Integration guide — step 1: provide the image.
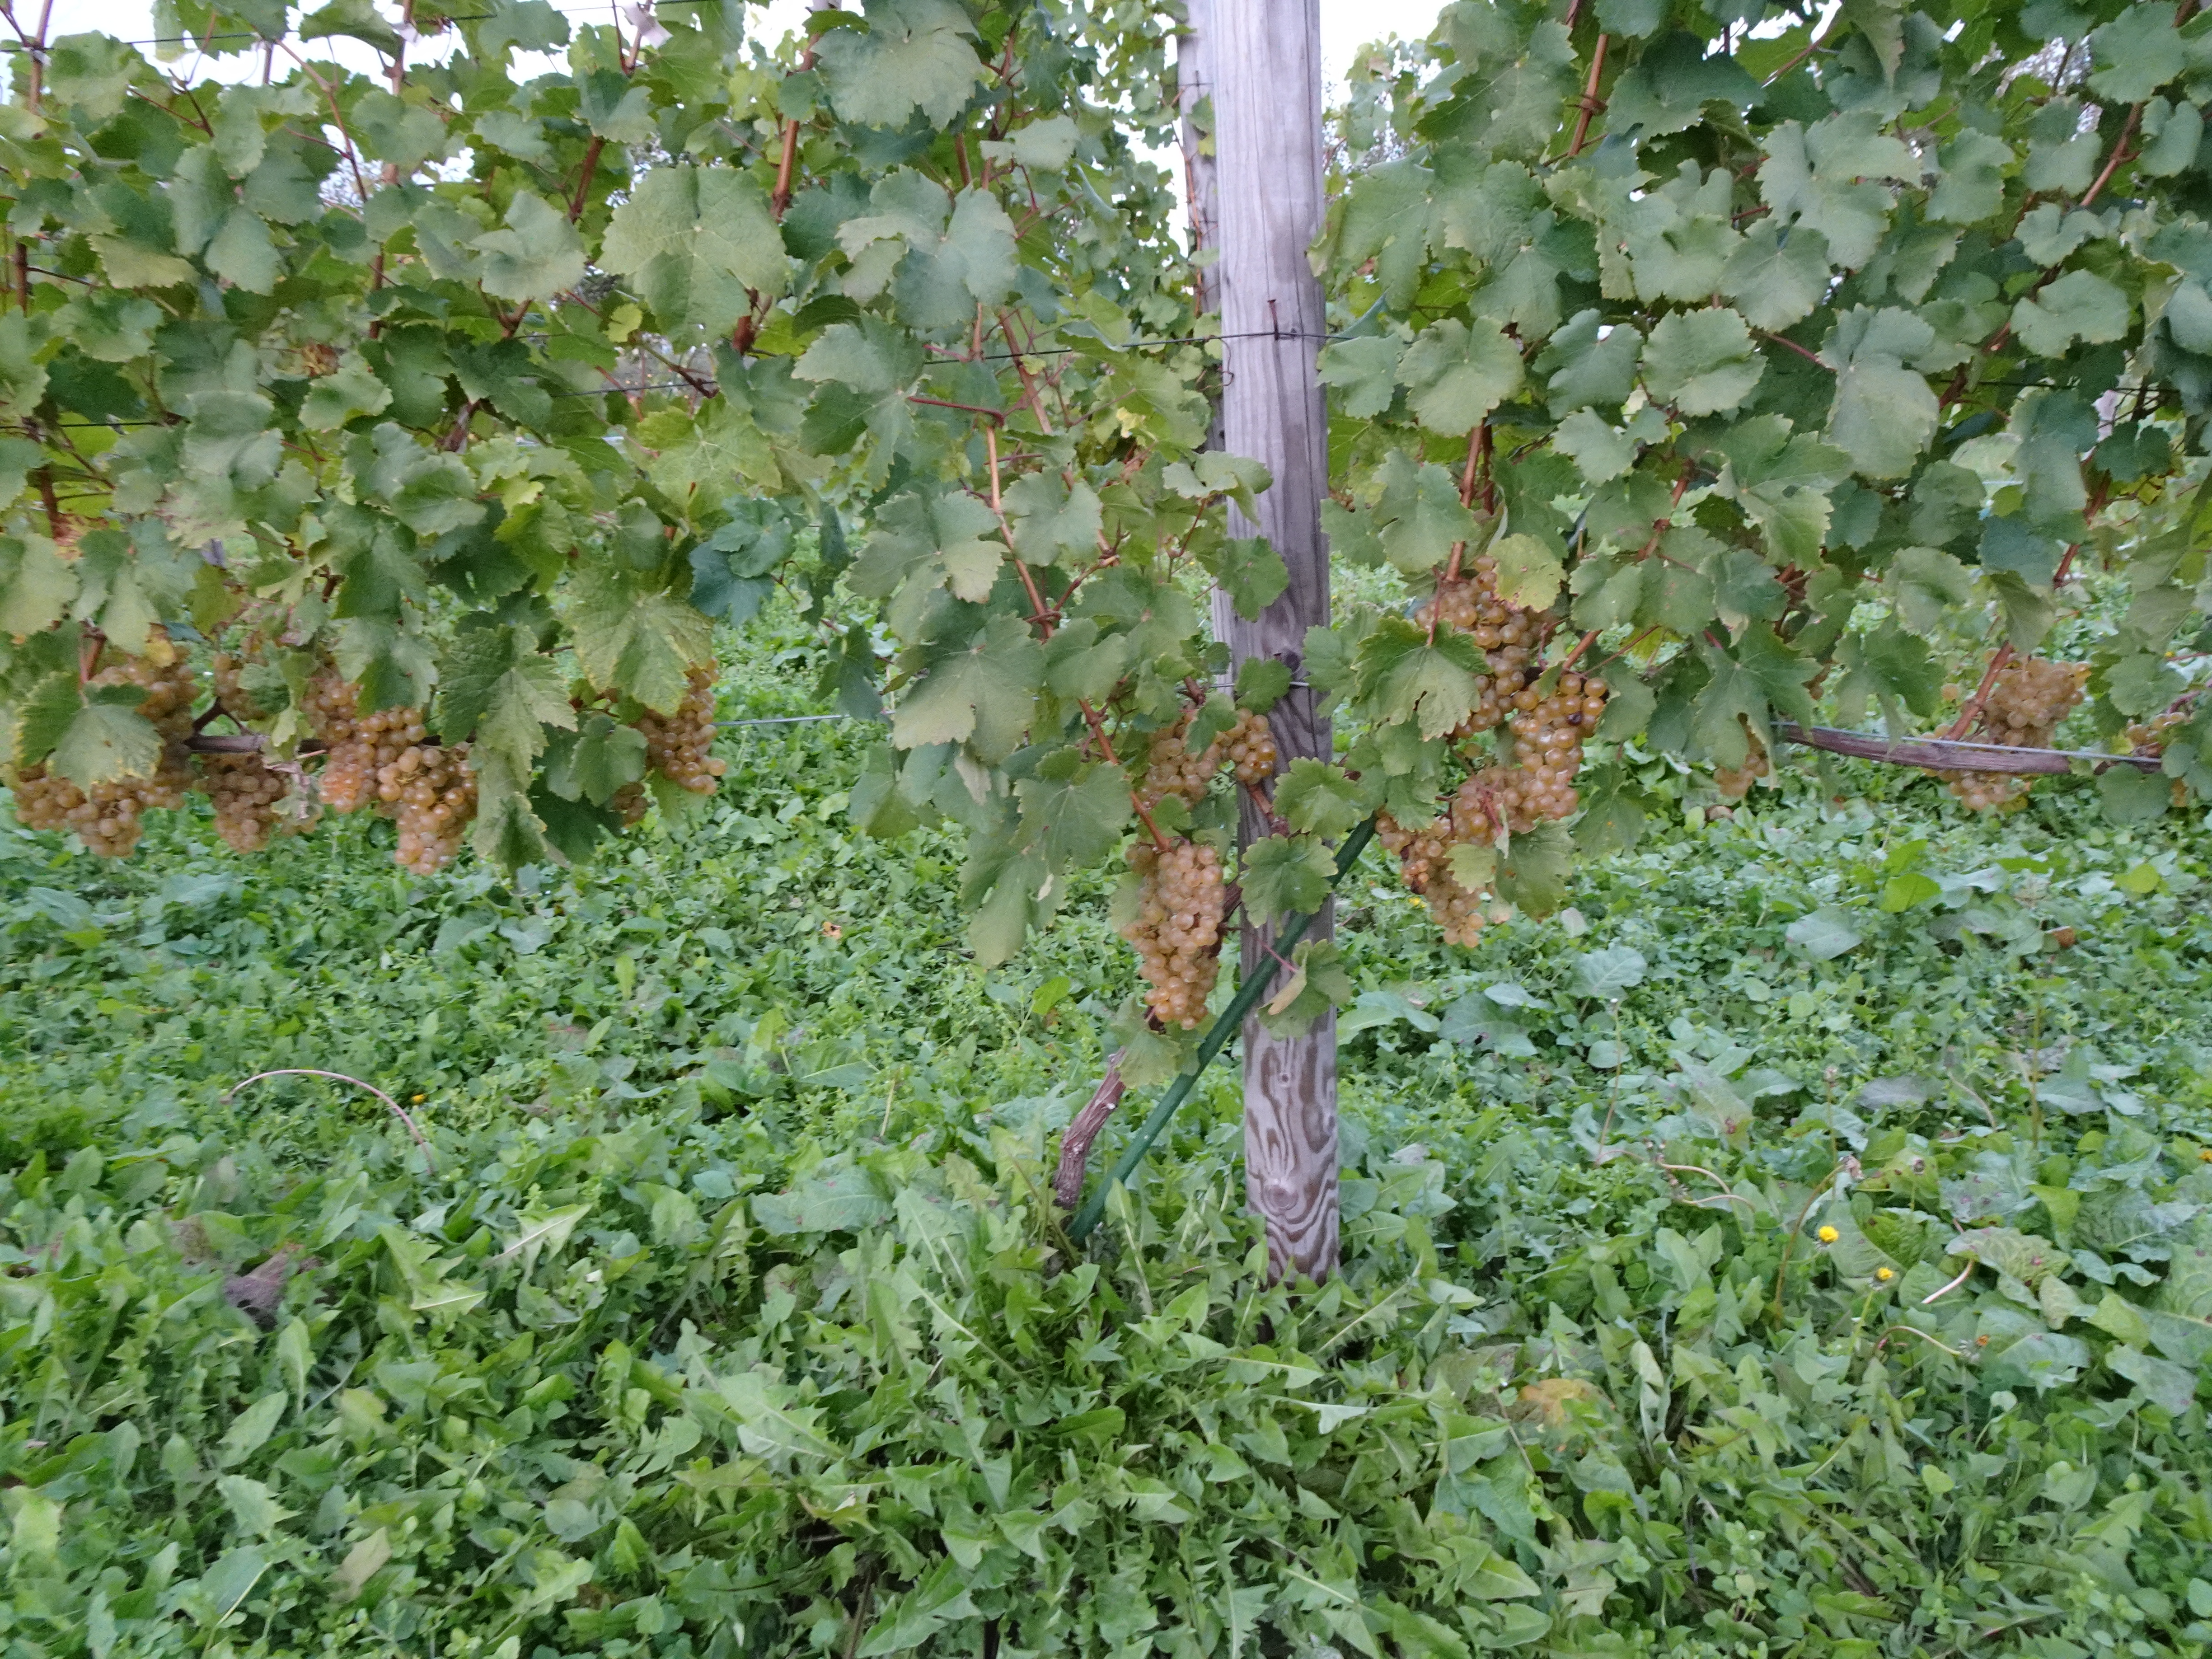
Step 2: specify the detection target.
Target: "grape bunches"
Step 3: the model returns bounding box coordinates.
[1501,673,1609,819]
[193,749,293,856]
[1415,555,1544,737]
[209,633,273,722]
[609,660,727,794]
[298,677,427,812]
[1117,846,1218,1033]
[1919,647,2099,810]
[1375,803,1487,948]
[90,641,204,796]
[611,782,649,829]
[0,764,85,834]
[1156,843,1225,957]
[67,775,184,860]
[273,781,325,836]
[1139,710,1222,813]
[2124,708,2206,807]
[1218,707,1280,784]
[376,746,477,877]
[1713,729,1765,802]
